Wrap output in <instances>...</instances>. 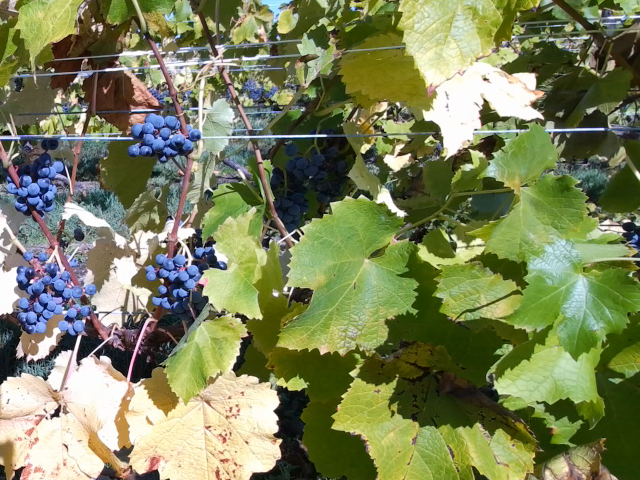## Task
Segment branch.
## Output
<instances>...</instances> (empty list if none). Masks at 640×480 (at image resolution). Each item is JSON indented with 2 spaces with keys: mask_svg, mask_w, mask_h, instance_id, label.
Here are the masks:
<instances>
[{
  "mask_svg": "<svg viewBox=\"0 0 640 480\" xmlns=\"http://www.w3.org/2000/svg\"><path fill=\"white\" fill-rule=\"evenodd\" d=\"M92 114H93V108H92V107H89V108H88L87 116H86V118H85V121H84V123H83V125H82V127H81V130H80V133H79V136H80V137H84V136H85V132H86V130H87V127H88V126H89V124H90V121H91V118H92Z\"/></svg>",
  "mask_w": 640,
  "mask_h": 480,
  "instance_id": "11",
  "label": "branch"
},
{
  "mask_svg": "<svg viewBox=\"0 0 640 480\" xmlns=\"http://www.w3.org/2000/svg\"><path fill=\"white\" fill-rule=\"evenodd\" d=\"M81 146H82V142H77L76 143V148H75L74 155H73V160H72V169H71V173H70L69 193L67 195V201L68 202H71L72 198L74 196L75 175H76V171H77V163H78V158H79V154H80V151H81Z\"/></svg>",
  "mask_w": 640,
  "mask_h": 480,
  "instance_id": "6",
  "label": "branch"
},
{
  "mask_svg": "<svg viewBox=\"0 0 640 480\" xmlns=\"http://www.w3.org/2000/svg\"><path fill=\"white\" fill-rule=\"evenodd\" d=\"M133 21L135 22L136 26L138 27V29L142 32V34L144 35L147 43L149 44L155 60L157 63H161L162 67L159 68L162 77L164 79V82L166 83V86L168 87L169 90V96L171 97V102L173 104L174 110H175V114L177 115V118L180 122V129H181V135L184 138H187L189 136V128L187 126V119L182 111L181 108V104L180 101L177 97V93H176V88H175V84L173 83L170 74L167 70V67L165 66V62L163 60V57L161 55V52L155 42V40L153 39L150 31L147 29V27L144 25L143 21L141 20V18L138 15H135L133 17Z\"/></svg>",
  "mask_w": 640,
  "mask_h": 480,
  "instance_id": "1",
  "label": "branch"
},
{
  "mask_svg": "<svg viewBox=\"0 0 640 480\" xmlns=\"http://www.w3.org/2000/svg\"><path fill=\"white\" fill-rule=\"evenodd\" d=\"M163 312H164V309L162 307H159L156 310V312H155V314H154V316H153V318H152V320H151V322H150V324L148 326V330L150 332H153L156 329Z\"/></svg>",
  "mask_w": 640,
  "mask_h": 480,
  "instance_id": "10",
  "label": "branch"
},
{
  "mask_svg": "<svg viewBox=\"0 0 640 480\" xmlns=\"http://www.w3.org/2000/svg\"><path fill=\"white\" fill-rule=\"evenodd\" d=\"M196 15H197V17H198V19H199V21H200V23H201V25H202V28H203V30H204V33H205L206 39H207V41H208V44L211 46V51L213 52L214 57H219V52H218V50H217V49H216V47H215V44H214V41H213L212 36H211V34H210V31H209L208 25H207V23H206V21H205V18H204V17H203V15H202L201 7H200V6H197V7H196Z\"/></svg>",
  "mask_w": 640,
  "mask_h": 480,
  "instance_id": "8",
  "label": "branch"
},
{
  "mask_svg": "<svg viewBox=\"0 0 640 480\" xmlns=\"http://www.w3.org/2000/svg\"><path fill=\"white\" fill-rule=\"evenodd\" d=\"M193 166H194V154L192 152H189L187 154V163H186V167H185L183 179H182L183 185L178 198L174 224L170 233V239H169L168 251H167V256L169 258H172L175 254L177 235L181 227L185 200L190 187V177H191Z\"/></svg>",
  "mask_w": 640,
  "mask_h": 480,
  "instance_id": "2",
  "label": "branch"
},
{
  "mask_svg": "<svg viewBox=\"0 0 640 480\" xmlns=\"http://www.w3.org/2000/svg\"><path fill=\"white\" fill-rule=\"evenodd\" d=\"M0 161L4 165L6 172L11 177L13 183L15 185H19L21 183V180L12 168V164L9 162L7 156L5 155L4 144L2 142H0Z\"/></svg>",
  "mask_w": 640,
  "mask_h": 480,
  "instance_id": "7",
  "label": "branch"
},
{
  "mask_svg": "<svg viewBox=\"0 0 640 480\" xmlns=\"http://www.w3.org/2000/svg\"><path fill=\"white\" fill-rule=\"evenodd\" d=\"M219 70H220V73L222 74V77L224 78L225 84H226V86H227V88H228V91H229V93H230L231 97H232V100H233V102H234L235 109L237 110V112H238V113H239V115L241 116V118H242V120H243L244 124L246 125V128L248 129L249 134H254V129H253V127H252V125H251L250 121L248 120L247 115H246V114H245V112L242 110V108H241V106H240V104H239L238 97H237V95H236V93H235V91H234V89H233V86H232V84H231V82H230V78H229V76L227 75V72H226V70H225L224 66H223V65H220V66H219Z\"/></svg>",
  "mask_w": 640,
  "mask_h": 480,
  "instance_id": "5",
  "label": "branch"
},
{
  "mask_svg": "<svg viewBox=\"0 0 640 480\" xmlns=\"http://www.w3.org/2000/svg\"><path fill=\"white\" fill-rule=\"evenodd\" d=\"M89 321L104 341H108L110 339L108 327L101 323L93 312L89 313Z\"/></svg>",
  "mask_w": 640,
  "mask_h": 480,
  "instance_id": "9",
  "label": "branch"
},
{
  "mask_svg": "<svg viewBox=\"0 0 640 480\" xmlns=\"http://www.w3.org/2000/svg\"><path fill=\"white\" fill-rule=\"evenodd\" d=\"M28 210L30 211V213L32 214L34 219L37 221V223L40 226L43 234L49 240V242H50L52 248L54 249V251L57 252V254H58L59 258H60L62 267L70 274V276H71L70 282L73 283L74 285H78L79 284V280L77 279L75 271L67 264L66 259H65V255L62 252V250L60 248V245H59V243L61 241V238L63 236V229H64V225L66 223V219L62 218L60 220L59 227H58V234H57L56 238L54 239V237L47 230L44 222L42 221V219L38 215V213L35 210V208L33 206H29Z\"/></svg>",
  "mask_w": 640,
  "mask_h": 480,
  "instance_id": "3",
  "label": "branch"
},
{
  "mask_svg": "<svg viewBox=\"0 0 640 480\" xmlns=\"http://www.w3.org/2000/svg\"><path fill=\"white\" fill-rule=\"evenodd\" d=\"M251 143H252L253 150H254V153L256 155V158H257L259 176L261 178L262 186H263L264 192L266 193V197H267L270 209L272 210L273 216L275 217V221L277 223L279 231H280L281 235L284 237V241L286 242L287 245H289L290 247H293L294 246V242L291 241V239L287 236V232L284 229V226L282 224L280 215L278 214L277 208H276V206L274 204L271 191L269 190V186H268L267 179H266V176H265V173H264V169H263L262 155H261L260 150L258 148V144H257L256 139H251Z\"/></svg>",
  "mask_w": 640,
  "mask_h": 480,
  "instance_id": "4",
  "label": "branch"
}]
</instances>
